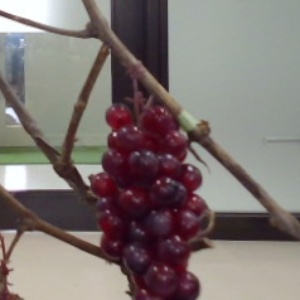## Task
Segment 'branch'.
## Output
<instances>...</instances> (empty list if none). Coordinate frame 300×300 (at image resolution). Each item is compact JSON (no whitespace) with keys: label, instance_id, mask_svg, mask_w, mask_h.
<instances>
[{"label":"branch","instance_id":"branch-1","mask_svg":"<svg viewBox=\"0 0 300 300\" xmlns=\"http://www.w3.org/2000/svg\"><path fill=\"white\" fill-rule=\"evenodd\" d=\"M84 7L89 15L90 20L87 21L82 31H67L50 27L46 24H38L30 19L18 17L9 14L0 9V16L12 19L13 21L35 29H41L53 34L68 36L71 38H79L89 40L95 38L102 41V46L97 52L95 61L90 68L81 93L76 99L74 109L70 121L68 123L67 134L63 138L62 156L58 150L52 148L43 138L41 130L37 126L35 119L26 111L12 89L8 86L2 76H0V91L3 99L9 104L13 111L18 115L20 122L23 124L25 132L33 142L36 143L53 164L55 175L64 181L69 187L86 202L87 206H95L99 202V198L93 194L90 187L84 182L83 175L71 162V152L75 139V134L80 124L83 113L86 110L90 99L92 89L97 85L101 75L104 63L109 59L110 47H113L119 57L125 62L127 68L135 73V77L139 79L152 94L159 98L163 105L169 107L173 116L178 121L180 127L186 132L189 142H196L201 145L208 153L215 157L226 170L231 173L254 198L265 208L270 215L268 223L272 227H278L282 231H286L291 236L300 238V222L294 219L289 212L283 210L268 191L255 182L247 172V170L234 160L233 156L217 143L216 140L209 135L212 133V125L205 119L196 120L191 114L185 111L184 107L177 101L172 94L168 93L159 84L155 77L150 73L148 68L132 55L128 48L121 42L118 36L111 31L107 20L104 18L98 5L94 0H82Z\"/></svg>","mask_w":300,"mask_h":300},{"label":"branch","instance_id":"branch-2","mask_svg":"<svg viewBox=\"0 0 300 300\" xmlns=\"http://www.w3.org/2000/svg\"><path fill=\"white\" fill-rule=\"evenodd\" d=\"M0 196L4 199L6 203L15 207L21 213L22 217L27 219L26 221H22L19 224L17 235L13 240L12 246L7 254L4 246V236L3 234H0L1 253L3 255L1 267H0V292H9V288L7 287L8 277H6L8 275V269L5 266V261H7V258L11 256L16 246V243L20 238V235H22L24 231H31V230H42L43 232H46L51 237H55L56 239H59L63 243L71 246L72 248L79 249L82 252H86L91 256L102 258L107 262L120 265L123 274L127 275L128 277L129 287H135L131 279L129 270L127 269V267H125L124 261H118L117 259L108 258L103 255L100 247L96 246L94 243L84 241L74 234L68 233L66 231H62L61 228H59L56 225H53L50 222L43 221L39 216H37L35 212L26 208L23 204H21V202H18L15 198H13L2 185H0Z\"/></svg>","mask_w":300,"mask_h":300}]
</instances>
